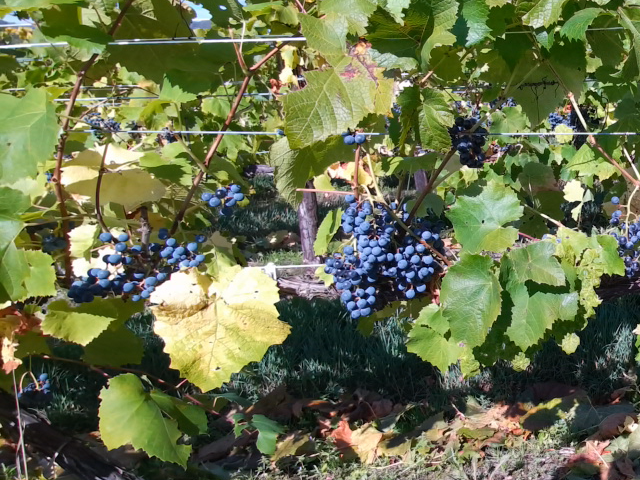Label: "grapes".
<instances>
[{
    "instance_id": "1",
    "label": "grapes",
    "mask_w": 640,
    "mask_h": 480,
    "mask_svg": "<svg viewBox=\"0 0 640 480\" xmlns=\"http://www.w3.org/2000/svg\"><path fill=\"white\" fill-rule=\"evenodd\" d=\"M345 203L350 207L345 209L342 214L341 229L344 234H353L357 240V252L360 259H357L353 253L355 247L346 245L343 253L346 255L345 260L340 253H334L324 259V273L326 275H334V282L338 290H344L341 294V300L345 303V309L350 312L352 319L361 317H369L372 314L373 305L376 302V288L367 286L365 289L356 288L354 291L349 290L352 285H360L362 276H367L369 283L377 280V272L379 264H381L382 275L384 277L396 278L398 290L405 291L406 299H414L417 294H423L427 290V284L424 282L435 274L434 256L432 254H423L427 251V247L416 240L407 236L404 244L398 253L388 252L386 246L391 242V236L396 233V228L388 225L393 218L388 214L383 205L378 202L375 207L380 210L376 224L380 226L377 229V239H369L372 233V224L365 220V215L372 213V205L370 203H362L359 205L358 200L353 194L345 196Z\"/></svg>"
},
{
    "instance_id": "2",
    "label": "grapes",
    "mask_w": 640,
    "mask_h": 480,
    "mask_svg": "<svg viewBox=\"0 0 640 480\" xmlns=\"http://www.w3.org/2000/svg\"><path fill=\"white\" fill-rule=\"evenodd\" d=\"M87 275L88 278L81 277L80 280H74L67 291V296L76 303L92 302L94 296L105 298L110 291L116 294L132 293L135 286L139 285L138 280L126 283L125 273L117 274L115 279L110 281L108 278L111 276V271L98 267L90 268Z\"/></svg>"
},
{
    "instance_id": "3",
    "label": "grapes",
    "mask_w": 640,
    "mask_h": 480,
    "mask_svg": "<svg viewBox=\"0 0 640 480\" xmlns=\"http://www.w3.org/2000/svg\"><path fill=\"white\" fill-rule=\"evenodd\" d=\"M158 233V238L165 240V246L162 247L159 242H152L148 245V250L158 253L159 258H166L168 265H175L173 267L174 271H178L182 266L199 267L206 260V257L202 254H193L191 261L187 258L189 252H198L199 245L207 241L206 235L196 234L195 241L187 242L186 247H182L177 246V240L174 237H170L167 228H159Z\"/></svg>"
},
{
    "instance_id": "4",
    "label": "grapes",
    "mask_w": 640,
    "mask_h": 480,
    "mask_svg": "<svg viewBox=\"0 0 640 480\" xmlns=\"http://www.w3.org/2000/svg\"><path fill=\"white\" fill-rule=\"evenodd\" d=\"M476 117L467 118L464 120L462 116L456 119V124L448 128L449 135L453 142V146L459 152L460 163L467 165L468 168H481L486 159V155L483 152V148L480 146L486 145V139L483 136H479V131H488L485 127L479 126V128L472 134L471 137L464 135L460 138H456L455 134L460 131L469 130L477 121Z\"/></svg>"
},
{
    "instance_id": "5",
    "label": "grapes",
    "mask_w": 640,
    "mask_h": 480,
    "mask_svg": "<svg viewBox=\"0 0 640 480\" xmlns=\"http://www.w3.org/2000/svg\"><path fill=\"white\" fill-rule=\"evenodd\" d=\"M202 201H209V207H218L224 200V208H219L218 213L221 217H228L233 212L236 201L244 200V193L241 192L239 184L230 183L229 187H217L214 193H202L200 195Z\"/></svg>"
},
{
    "instance_id": "6",
    "label": "grapes",
    "mask_w": 640,
    "mask_h": 480,
    "mask_svg": "<svg viewBox=\"0 0 640 480\" xmlns=\"http://www.w3.org/2000/svg\"><path fill=\"white\" fill-rule=\"evenodd\" d=\"M171 272H172L171 266H166L165 268H162L161 270L157 271L155 273V277L145 276L143 272H140V273L133 272L132 276L134 279L144 280L143 281L144 290L140 292V295H133L131 297V301L133 303H138L142 299H148L150 297V294L155 293V287L159 285L160 282L169 280V274Z\"/></svg>"
},
{
    "instance_id": "7",
    "label": "grapes",
    "mask_w": 640,
    "mask_h": 480,
    "mask_svg": "<svg viewBox=\"0 0 640 480\" xmlns=\"http://www.w3.org/2000/svg\"><path fill=\"white\" fill-rule=\"evenodd\" d=\"M628 233L627 238L626 236H620L617 232H610V235L616 238L618 242L617 251L620 257L625 255L626 250H632L635 245L640 243V218L637 219V223L629 224Z\"/></svg>"
},
{
    "instance_id": "8",
    "label": "grapes",
    "mask_w": 640,
    "mask_h": 480,
    "mask_svg": "<svg viewBox=\"0 0 640 480\" xmlns=\"http://www.w3.org/2000/svg\"><path fill=\"white\" fill-rule=\"evenodd\" d=\"M37 382L40 383L41 390L36 391V384L30 383L26 387L21 388L17 392V397L19 400H25L30 394L34 397L44 396L47 399L52 398V388L50 387L49 373L43 372L37 378Z\"/></svg>"
},
{
    "instance_id": "9",
    "label": "grapes",
    "mask_w": 640,
    "mask_h": 480,
    "mask_svg": "<svg viewBox=\"0 0 640 480\" xmlns=\"http://www.w3.org/2000/svg\"><path fill=\"white\" fill-rule=\"evenodd\" d=\"M44 249L48 252H54L56 248L63 249L66 245V240L62 236H55L54 234H46L44 236Z\"/></svg>"
},
{
    "instance_id": "10",
    "label": "grapes",
    "mask_w": 640,
    "mask_h": 480,
    "mask_svg": "<svg viewBox=\"0 0 640 480\" xmlns=\"http://www.w3.org/2000/svg\"><path fill=\"white\" fill-rule=\"evenodd\" d=\"M640 255V252L638 250H635L633 252V256L632 255H628L624 258V266H625V272L627 273L628 277H634L635 276V271H639L640 267H639V262L638 261H634L635 259H638Z\"/></svg>"
},
{
    "instance_id": "11",
    "label": "grapes",
    "mask_w": 640,
    "mask_h": 480,
    "mask_svg": "<svg viewBox=\"0 0 640 480\" xmlns=\"http://www.w3.org/2000/svg\"><path fill=\"white\" fill-rule=\"evenodd\" d=\"M102 261L104 263H109L112 266H117L119 264L131 265L133 263L132 257H123L121 258L120 254H112V255H103Z\"/></svg>"
},
{
    "instance_id": "12",
    "label": "grapes",
    "mask_w": 640,
    "mask_h": 480,
    "mask_svg": "<svg viewBox=\"0 0 640 480\" xmlns=\"http://www.w3.org/2000/svg\"><path fill=\"white\" fill-rule=\"evenodd\" d=\"M341 137L343 138V143L347 146H353L355 144H364L366 142V137L352 135V132L350 130H347L345 133H342Z\"/></svg>"
},
{
    "instance_id": "13",
    "label": "grapes",
    "mask_w": 640,
    "mask_h": 480,
    "mask_svg": "<svg viewBox=\"0 0 640 480\" xmlns=\"http://www.w3.org/2000/svg\"><path fill=\"white\" fill-rule=\"evenodd\" d=\"M413 232L427 241H438L440 238L439 232L425 231L424 229L420 228H414Z\"/></svg>"
},
{
    "instance_id": "14",
    "label": "grapes",
    "mask_w": 640,
    "mask_h": 480,
    "mask_svg": "<svg viewBox=\"0 0 640 480\" xmlns=\"http://www.w3.org/2000/svg\"><path fill=\"white\" fill-rule=\"evenodd\" d=\"M119 242L114 245V249L117 252H126L128 249V244L126 243L129 240V235L127 233H122L118 236Z\"/></svg>"
},
{
    "instance_id": "15",
    "label": "grapes",
    "mask_w": 640,
    "mask_h": 480,
    "mask_svg": "<svg viewBox=\"0 0 640 480\" xmlns=\"http://www.w3.org/2000/svg\"><path fill=\"white\" fill-rule=\"evenodd\" d=\"M622 216V212L620 210H615L612 213V218L610 219V225L611 226H618L620 229H625L626 228V223L625 222H621L620 223V217Z\"/></svg>"
},
{
    "instance_id": "16",
    "label": "grapes",
    "mask_w": 640,
    "mask_h": 480,
    "mask_svg": "<svg viewBox=\"0 0 640 480\" xmlns=\"http://www.w3.org/2000/svg\"><path fill=\"white\" fill-rule=\"evenodd\" d=\"M407 208H408V204H407V203H404V204L402 205V212H403V213H402V216H403V217L401 218L403 222H405L406 216L408 215Z\"/></svg>"
}]
</instances>
